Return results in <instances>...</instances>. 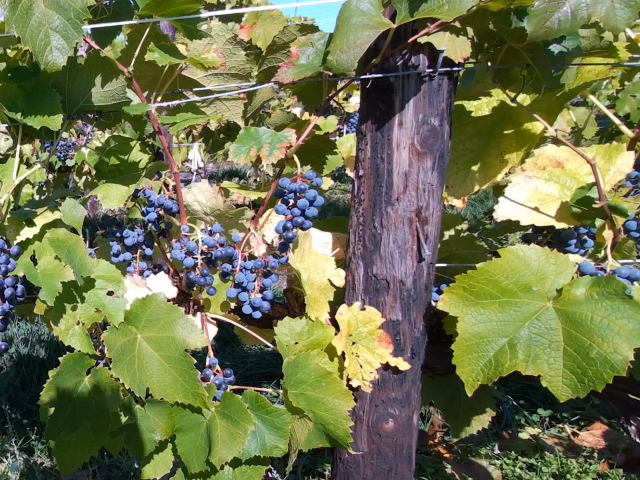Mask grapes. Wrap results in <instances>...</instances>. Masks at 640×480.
I'll use <instances>...</instances> for the list:
<instances>
[{
    "label": "grapes",
    "instance_id": "14",
    "mask_svg": "<svg viewBox=\"0 0 640 480\" xmlns=\"http://www.w3.org/2000/svg\"><path fill=\"white\" fill-rule=\"evenodd\" d=\"M138 268L141 270L139 275L142 279L148 278L152 275H157L164 270V266L162 264H154L151 269L145 261H140L138 263Z\"/></svg>",
    "mask_w": 640,
    "mask_h": 480
},
{
    "label": "grapes",
    "instance_id": "9",
    "mask_svg": "<svg viewBox=\"0 0 640 480\" xmlns=\"http://www.w3.org/2000/svg\"><path fill=\"white\" fill-rule=\"evenodd\" d=\"M185 280V286L188 289H193L196 285L199 288L208 286L206 289L208 296H216L218 294L217 288L212 286L214 284V277L210 274L208 268H202L199 276L194 271L187 272L185 274Z\"/></svg>",
    "mask_w": 640,
    "mask_h": 480
},
{
    "label": "grapes",
    "instance_id": "1",
    "mask_svg": "<svg viewBox=\"0 0 640 480\" xmlns=\"http://www.w3.org/2000/svg\"><path fill=\"white\" fill-rule=\"evenodd\" d=\"M224 231V227L220 223L213 224L209 230L203 228L201 233L204 235L202 245L210 249H215L217 245L219 247L216 250L211 251L206 257V265L209 268H213L219 260H231L230 263H223L219 275L224 280H229L232 277V272L239 269L235 276V281L238 283L235 288H227L224 291V296L228 300H238L241 306V311L245 315H251L254 320H259L263 317V312H269L272 309L271 301L274 299V293L271 290H264L261 293V297H253L249 299L255 285L256 277L252 271L256 269H264L266 267V261L264 259L254 260H242L239 264L240 252L231 246L227 245V239L224 236H219L214 239V234H221Z\"/></svg>",
    "mask_w": 640,
    "mask_h": 480
},
{
    "label": "grapes",
    "instance_id": "12",
    "mask_svg": "<svg viewBox=\"0 0 640 480\" xmlns=\"http://www.w3.org/2000/svg\"><path fill=\"white\" fill-rule=\"evenodd\" d=\"M634 218L635 213H631L628 220L624 223V233L628 237L634 238L636 249L640 251V220H634Z\"/></svg>",
    "mask_w": 640,
    "mask_h": 480
},
{
    "label": "grapes",
    "instance_id": "16",
    "mask_svg": "<svg viewBox=\"0 0 640 480\" xmlns=\"http://www.w3.org/2000/svg\"><path fill=\"white\" fill-rule=\"evenodd\" d=\"M448 288H449V285L447 283L441 284L440 286L434 285L431 291V299L435 302H438L440 300V296Z\"/></svg>",
    "mask_w": 640,
    "mask_h": 480
},
{
    "label": "grapes",
    "instance_id": "3",
    "mask_svg": "<svg viewBox=\"0 0 640 480\" xmlns=\"http://www.w3.org/2000/svg\"><path fill=\"white\" fill-rule=\"evenodd\" d=\"M532 232H523L520 235L525 244L535 243L540 247L556 249L560 253L578 255H584L587 249L593 248L598 239L597 230L592 227L556 229L553 225H534Z\"/></svg>",
    "mask_w": 640,
    "mask_h": 480
},
{
    "label": "grapes",
    "instance_id": "15",
    "mask_svg": "<svg viewBox=\"0 0 640 480\" xmlns=\"http://www.w3.org/2000/svg\"><path fill=\"white\" fill-rule=\"evenodd\" d=\"M304 178L306 180H311V185L315 188H321L324 185L323 178L321 176H317V173L313 170H308L304 173Z\"/></svg>",
    "mask_w": 640,
    "mask_h": 480
},
{
    "label": "grapes",
    "instance_id": "8",
    "mask_svg": "<svg viewBox=\"0 0 640 480\" xmlns=\"http://www.w3.org/2000/svg\"><path fill=\"white\" fill-rule=\"evenodd\" d=\"M172 248L171 257L182 262L185 268L193 267L196 264L194 257H187L195 256L200 252V247L195 241H188L186 237H182L179 242L172 245Z\"/></svg>",
    "mask_w": 640,
    "mask_h": 480
},
{
    "label": "grapes",
    "instance_id": "13",
    "mask_svg": "<svg viewBox=\"0 0 640 480\" xmlns=\"http://www.w3.org/2000/svg\"><path fill=\"white\" fill-rule=\"evenodd\" d=\"M622 186L624 188L629 187V190H627L624 193V197L626 199L631 198L634 195V193L636 192V189L640 190V172H638V171L629 172L627 174V180H624L622 182Z\"/></svg>",
    "mask_w": 640,
    "mask_h": 480
},
{
    "label": "grapes",
    "instance_id": "5",
    "mask_svg": "<svg viewBox=\"0 0 640 480\" xmlns=\"http://www.w3.org/2000/svg\"><path fill=\"white\" fill-rule=\"evenodd\" d=\"M133 197L135 199L144 197L148 202L149 206H146L140 212V215L145 217L144 222L146 224H152V230L154 232H159L161 230L160 221L164 219V216L158 213L160 209L171 217H176L180 213L178 204L173 198L167 199L165 195H159L152 189L145 188L140 190L139 188H136L134 190Z\"/></svg>",
    "mask_w": 640,
    "mask_h": 480
},
{
    "label": "grapes",
    "instance_id": "2",
    "mask_svg": "<svg viewBox=\"0 0 640 480\" xmlns=\"http://www.w3.org/2000/svg\"><path fill=\"white\" fill-rule=\"evenodd\" d=\"M278 187L272 197L280 203L274 207V213L281 216H292L291 220H279L274 226V231L283 235L285 242H280L276 250L280 253H286L289 245L297 242V235L293 232L296 228L300 231H309L313 227L310 219L318 216V209L325 204V199L318 195L315 189H310L308 183L292 182L289 177H282L278 182ZM298 194H303L304 198H297L294 206L288 209L289 200H294Z\"/></svg>",
    "mask_w": 640,
    "mask_h": 480
},
{
    "label": "grapes",
    "instance_id": "6",
    "mask_svg": "<svg viewBox=\"0 0 640 480\" xmlns=\"http://www.w3.org/2000/svg\"><path fill=\"white\" fill-rule=\"evenodd\" d=\"M4 288V303L0 304V332L8 329L11 311L17 306V301H23L26 298V290L24 285L17 281L14 276H8L4 280L0 279V290Z\"/></svg>",
    "mask_w": 640,
    "mask_h": 480
},
{
    "label": "grapes",
    "instance_id": "7",
    "mask_svg": "<svg viewBox=\"0 0 640 480\" xmlns=\"http://www.w3.org/2000/svg\"><path fill=\"white\" fill-rule=\"evenodd\" d=\"M219 364V359L216 356H211L209 358V366L211 368H202L200 370L199 379L202 376L205 380H210L214 387L218 389L216 391L215 399L220 401L222 399V395L227 388V385H235L237 383V378L235 377L234 371L230 367H226L223 370V376L214 375V370L212 368H216Z\"/></svg>",
    "mask_w": 640,
    "mask_h": 480
},
{
    "label": "grapes",
    "instance_id": "10",
    "mask_svg": "<svg viewBox=\"0 0 640 480\" xmlns=\"http://www.w3.org/2000/svg\"><path fill=\"white\" fill-rule=\"evenodd\" d=\"M8 250L7 243L0 239V276H7L17 268V261L14 259L22 254V248L19 245H13L9 254L3 253Z\"/></svg>",
    "mask_w": 640,
    "mask_h": 480
},
{
    "label": "grapes",
    "instance_id": "11",
    "mask_svg": "<svg viewBox=\"0 0 640 480\" xmlns=\"http://www.w3.org/2000/svg\"><path fill=\"white\" fill-rule=\"evenodd\" d=\"M612 276H618L617 280L620 283L627 285L626 292L631 294L633 292L634 281L640 280V269L634 268L632 265H624L623 267H616L610 271Z\"/></svg>",
    "mask_w": 640,
    "mask_h": 480
},
{
    "label": "grapes",
    "instance_id": "4",
    "mask_svg": "<svg viewBox=\"0 0 640 480\" xmlns=\"http://www.w3.org/2000/svg\"><path fill=\"white\" fill-rule=\"evenodd\" d=\"M115 235L118 238H123V243L125 244L124 250L125 253L122 252V246L118 244L115 240H111L109 245L111 250L109 251V255L111 256V261L113 263H125V271L127 273H133L136 270V263L131 261L133 259V255L139 252L138 247L141 245L144 253L142 257L145 260L151 259L154 253V233L149 231L147 235H144V231L142 229H117L115 231Z\"/></svg>",
    "mask_w": 640,
    "mask_h": 480
}]
</instances>
